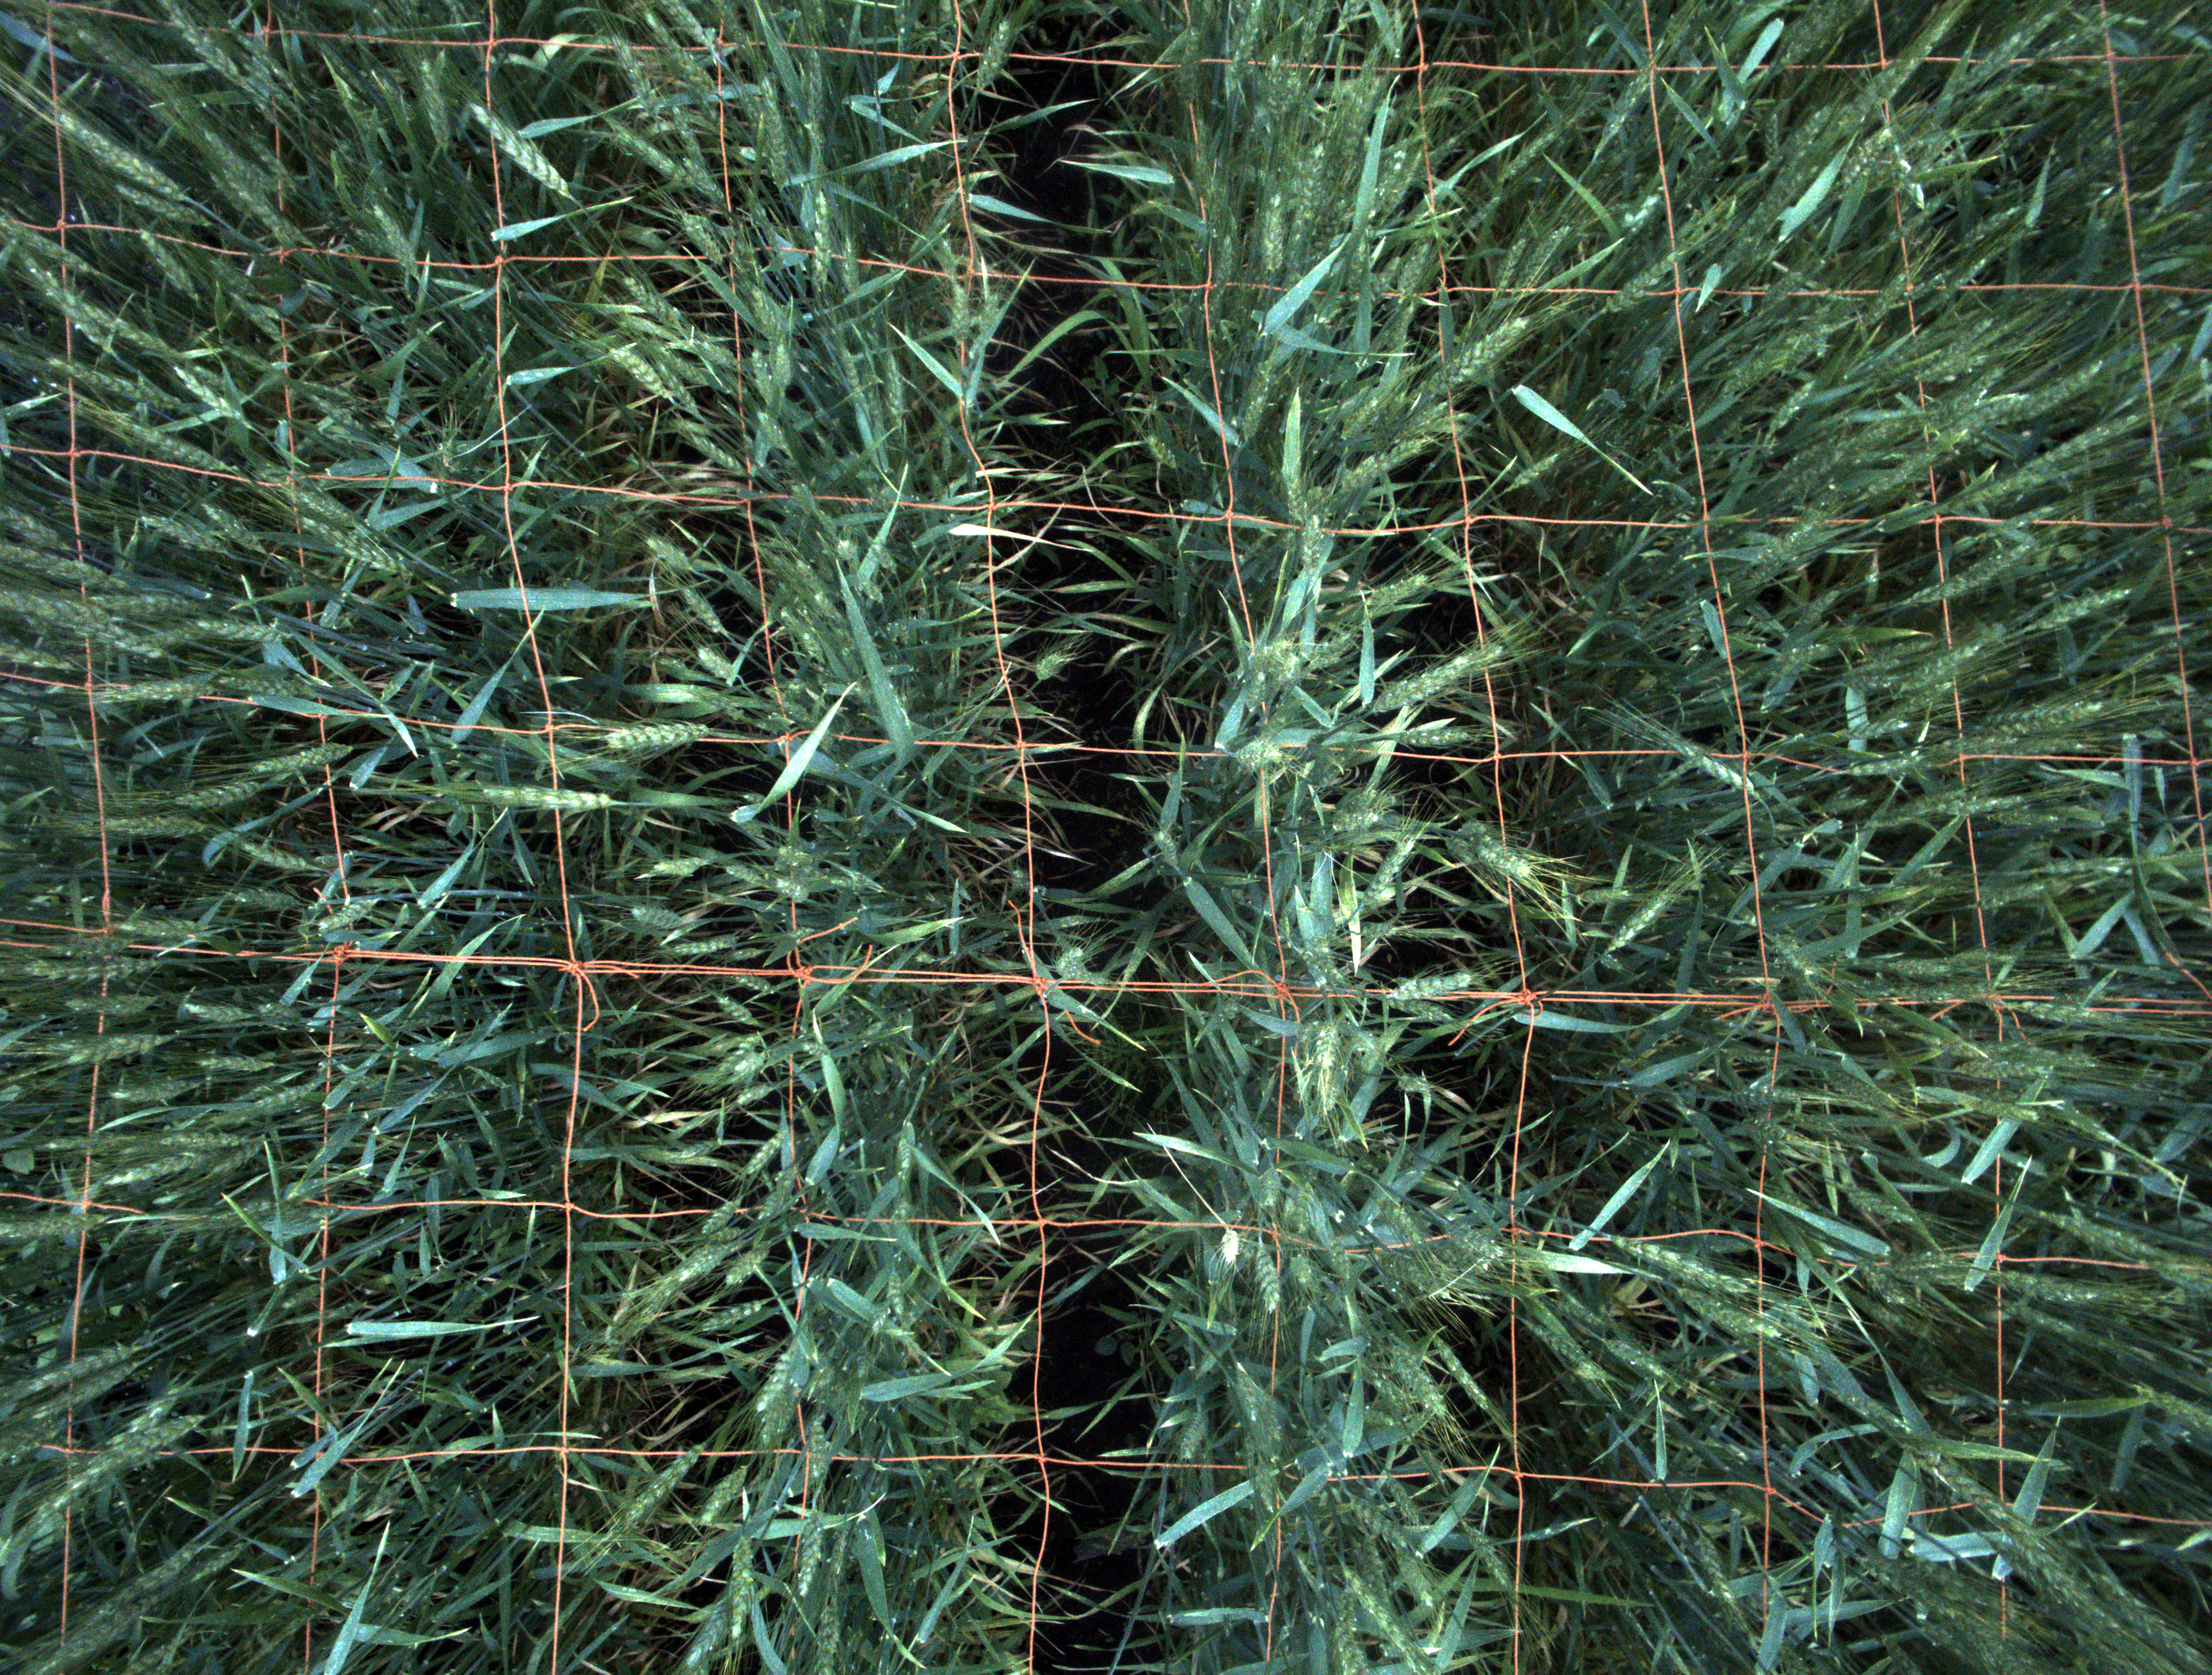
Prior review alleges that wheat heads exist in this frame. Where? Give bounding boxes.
[1388,303,1414,349]
[1299,514,1326,569]
[1286,1180,1317,1227]
[1881,980,1962,1009]
[1327,809,1380,835]
[1317,1024,1336,1108]
[748,281,781,342]
[1903,330,1945,358]
[1908,544,2031,603]
[882,353,902,421]
[162,1128,250,1150]
[794,2,814,36]
[1937,979,1999,1003]
[1196,121,1215,194]
[911,951,939,967]
[1417,317,1526,403]
[678,211,725,268]
[1853,1255,1912,1308]
[1912,1030,1982,1058]
[603,345,672,399]
[1396,1552,1435,1613]
[165,2,261,103]
[1678,1289,1778,1345]
[1764,149,1807,218]
[1939,793,2023,817]
[373,199,420,279]
[366,1475,404,1515]
[1382,1380,1412,1422]
[169,772,259,817]
[58,111,180,198]
[650,855,708,880]
[2083,1639,2138,1675]
[755,1186,786,1221]
[798,1513,826,1595]
[1724,1085,1802,1106]
[802,1040,831,1057]
[938,435,956,473]
[1844,1286,1919,1336]
[825,876,852,889]
[1768,377,1817,434]
[1239,534,1268,557]
[429,1089,462,1104]
[276,213,315,247]
[1509,454,1559,492]
[313,897,378,933]
[1373,640,1502,715]
[1401,398,1447,439]
[1263,1396,1279,1438]
[1601,249,1684,309]
[249,134,290,179]
[888,1270,909,1316]
[254,740,351,777]
[1064,968,1105,987]
[1898,1438,2032,1533]
[742,790,765,804]
[1896,158,1925,212]
[181,1002,252,1028]
[856,1356,870,1381]
[805,49,827,134]
[1603,1235,1752,1302]
[1891,957,1956,979]
[1366,574,1428,608]
[617,121,693,187]
[113,179,205,232]
[416,327,452,364]
[1260,194,1285,272]
[1785,320,1846,346]
[1462,836,1535,879]
[1782,2,1849,71]
[149,622,203,647]
[1921,1622,1980,1670]
[705,1226,743,1243]
[1338,49,1376,172]
[201,504,266,553]
[1512,224,1570,303]
[666,0,706,45]
[20,954,163,988]
[1401,728,1478,748]
[237,884,300,915]
[1756,557,1787,588]
[1887,793,1932,815]
[76,300,175,355]
[645,534,695,571]
[203,127,253,177]
[77,27,176,98]
[1319,1583,1370,1673]
[1360,920,1400,943]
[1339,398,1378,445]
[87,591,208,626]
[276,1601,328,1647]
[1464,196,1503,234]
[287,1300,365,1327]
[671,103,704,161]
[1974,1099,2038,1123]
[932,681,944,703]
[694,1462,747,1527]
[1281,653,1301,687]
[1865,1012,1904,1033]
[1214,185,1226,216]
[802,485,816,511]
[1035,653,1073,681]
[1346,439,1429,491]
[2074,13,2127,45]
[1231,1367,1257,1425]
[0,544,106,588]
[40,1593,157,1667]
[1496,131,1557,182]
[1970,881,2045,910]
[110,1078,201,1104]
[234,29,301,89]
[742,94,765,134]
[5,1361,141,1459]
[1883,897,1911,922]
[929,475,942,499]
[1660,324,1688,355]
[32,1135,136,1151]
[2005,1303,2076,1338]
[1954,1061,2051,1082]
[1394,1073,1430,1097]
[838,535,859,566]
[686,1594,731,1669]
[1785,591,1838,641]
[1786,1115,1839,1135]
[298,516,412,581]
[202,173,240,212]
[139,516,232,561]
[2004,1514,2121,1633]
[1920,256,1988,316]
[1946,314,1993,355]
[49,1389,178,1511]
[975,294,999,346]
[1351,1026,1388,1065]
[1955,503,2052,556]
[659,365,698,409]
[680,585,733,640]
[1948,950,2017,968]
[935,239,955,272]
[718,1031,760,1074]
[758,76,791,185]
[1574,885,1630,910]
[85,1542,207,1626]
[62,993,163,1017]
[1446,832,1474,863]
[1838,127,1893,191]
[817,592,846,631]
[895,1136,912,1172]
[785,926,815,941]
[1922,865,1946,885]
[1912,123,1962,175]
[729,948,764,961]
[700,644,737,680]
[265,465,364,528]
[1786,111,1822,166]
[774,1381,800,1434]
[299,1197,346,1224]
[783,679,801,701]
[1855,11,1953,111]
[238,837,312,873]
[2032,858,2130,874]
[2022,11,2054,44]
[1254,1452,1275,1512]
[1845,754,1910,777]
[450,1297,482,1324]
[311,398,369,436]
[1817,797,1865,816]
[1242,1434,1254,1480]
[392,1012,456,1033]
[1518,1315,1588,1371]
[789,485,807,514]
[974,20,1012,92]
[724,1242,768,1287]
[777,845,815,870]
[668,336,736,368]
[699,1299,761,1333]
[1609,886,1677,956]
[1,588,117,638]
[829,1526,848,1573]
[758,1401,779,1448]
[115,422,240,474]
[1847,720,1909,740]
[1722,1048,1769,1065]
[1876,638,1931,656]
[1830,1383,1902,1428]
[1954,203,2021,252]
[1984,699,2103,729]
[1257,1165,1283,1210]
[0,642,75,675]
[900,627,911,649]
[2035,37,2078,63]
[1285,141,1324,292]
[1283,487,1301,520]
[857,572,883,605]
[811,0,829,31]
[100,1153,201,1189]
[2007,737,2084,755]
[0,505,74,554]
[1883,682,1954,719]
[693,434,749,479]
[315,849,339,867]
[662,356,709,385]
[279,1278,340,1309]
[779,700,810,728]
[470,100,573,199]
[749,350,774,407]
[782,605,806,638]
[1396,241,1429,302]
[726,865,766,888]
[1361,835,1417,904]
[1769,1187,1809,1209]
[1379,1247,1435,1292]
[46,354,183,412]
[950,285,973,345]
[884,624,898,645]
[1464,1524,1512,1593]
[1443,1221,1507,1267]
[1839,428,1887,451]
[207,260,268,302]
[2010,1003,2129,1031]
[2167,695,2210,725]
[627,1445,702,1523]
[2181,480,2211,504]
[1760,164,1819,231]
[750,206,785,264]
[1416,135,1459,172]
[1915,321,2012,382]
[678,1241,731,1283]
[2133,1386,2179,1415]
[1220,996,1240,1022]
[1237,362,1269,441]
[1775,442,1825,479]
[873,540,899,573]
[1229,2,1266,87]
[206,1143,262,1182]
[434,438,471,520]
[1173,29,1200,98]
[1782,458,1838,501]
[765,555,803,590]
[2022,411,2140,474]
[1376,130,1426,152]
[1547,1296,1607,1333]
[1690,1534,1755,1637]
[1371,255,1403,293]
[743,1127,787,1177]
[1974,1085,2019,1101]
[1054,945,1085,975]
[1985,1039,2098,1072]
[700,1201,735,1232]
[798,556,824,593]
[894,0,918,33]
[1683,745,1757,792]
[1332,1241,1350,1285]
[1361,1542,1391,1608]
[1370,795,1395,808]
[655,25,715,89]
[809,189,833,287]
[197,618,289,642]
[1493,235,1524,302]
[65,931,130,959]
[843,235,862,289]
[1309,636,1330,660]
[804,631,826,667]
[105,678,214,705]
[234,294,294,353]
[2008,355,2103,420]
[1935,735,2015,754]
[221,168,287,232]
[808,1422,830,1482]
[0,1344,131,1410]
[1751,519,1818,565]
[215,678,302,700]
[1006,867,1028,892]
[757,406,789,453]
[1140,429,1179,468]
[1391,1340,1447,1418]
[1992,1540,2048,1596]
[1826,1064,1902,1112]
[1297,1017,1317,1068]
[1866,270,1906,322]
[834,341,862,395]
[1600,61,1663,143]
[1929,884,1962,899]
[1955,364,2002,415]
[1948,37,2031,97]
[1989,812,2058,827]
[1349,1495,1408,1555]
[1840,1179,1916,1225]
[1431,1332,1489,1410]
[1901,634,1991,681]
[1686,159,1717,190]
[1174,1410,1209,1461]
[1320,749,1356,787]
[728,240,760,280]
[672,935,737,955]
[65,1035,181,1067]
[1317,949,1344,984]
[1385,1468,1422,1528]
[1380,971,1473,997]
[1766,114,1780,164]
[1625,184,1660,237]
[260,1002,309,1033]
[1254,1248,1282,1315]
[250,1084,313,1114]
[2092,1578,2185,1662]
[122,917,203,943]
[602,720,710,755]
[1215,234,1234,284]
[1947,393,2030,439]
[1902,270,1952,307]
[214,1200,272,1226]
[734,974,774,994]
[191,1537,250,1583]
[716,994,754,1024]
[1777,642,1833,680]
[1607,1341,1668,1379]
[1289,942,1323,980]
[2,217,95,277]
[1461,820,1493,836]
[1728,352,1770,397]
[483,783,615,816]
[1913,1562,1998,1609]
[614,314,678,342]
[1665,0,1704,47]
[243,63,300,114]
[1847,672,1899,692]
[682,1137,726,1166]
[125,1643,170,1674]
[62,626,166,662]
[1300,15,1320,60]
[101,814,210,841]
[625,275,682,330]
[1291,1254,1316,1294]
[1860,450,1933,500]
[1344,1567,1435,1675]
[2037,1209,2158,1258]
[1306,658,1343,672]
[1753,271,1801,315]
[775,877,809,905]
[1969,474,2046,502]
[1872,1557,2022,1669]
[682,160,724,201]
[731,1051,767,1081]
[0,1212,104,1243]
[1385,1192,1427,1249]
[716,5,755,63]
[1885,1254,1972,1284]
[348,221,391,253]
[1282,69,1300,112]
[194,1056,279,1077]
[916,605,928,619]
[682,683,753,725]
[608,34,666,118]
[1308,196,1345,263]
[1775,933,1813,976]
[736,1083,774,1105]
[1216,1226,1242,1268]
[1978,81,2054,106]
[219,344,277,375]
[815,1606,842,1673]
[136,235,202,301]
[1374,152,1405,209]
[1937,356,1988,383]
[1989,1269,2100,1301]
[754,1349,792,1411]
[299,380,355,401]
[16,251,110,347]
[1231,738,1286,775]
[726,1534,755,1638]
[773,343,795,384]
[871,1307,890,1335]
[629,906,688,928]
[1152,830,1179,868]
[1388,1000,1452,1024]
[1737,1119,1792,1146]
[1867,815,1916,828]
[1262,62,1280,111]
[169,364,255,430]
[319,40,363,94]
[1247,670,1265,713]
[113,1411,208,1469]
[2034,584,2133,632]
[419,60,455,154]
